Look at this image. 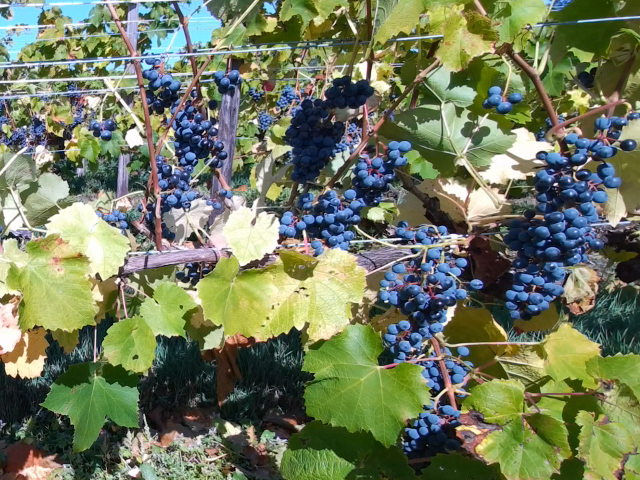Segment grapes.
<instances>
[{
  "label": "grapes",
  "mask_w": 640,
  "mask_h": 480,
  "mask_svg": "<svg viewBox=\"0 0 640 480\" xmlns=\"http://www.w3.org/2000/svg\"><path fill=\"white\" fill-rule=\"evenodd\" d=\"M443 249L441 247L430 248L426 256V261L420 262L418 258L411 259L409 265L419 268L428 274L422 285H410L419 283L421 278L414 274H406L403 280L397 274L407 271L404 262L395 263L391 270L385 273V279L380 281V286L387 290L379 292V298L383 302H388L390 306L399 307V312L404 316L409 315V321H397L396 324H388L384 334V339L391 343L389 352L397 355L392 359L393 364L405 362L411 348L416 355H423L430 350L429 346L423 348L422 343L430 340L433 334H442L445 331L448 307L456 304V300L465 299L468 292L465 289H458L457 280L448 276L453 274L461 277L464 268L469 266V261L462 257H452L445 254L443 263H438L442 259Z\"/></svg>",
  "instance_id": "grapes-2"
},
{
  "label": "grapes",
  "mask_w": 640,
  "mask_h": 480,
  "mask_svg": "<svg viewBox=\"0 0 640 480\" xmlns=\"http://www.w3.org/2000/svg\"><path fill=\"white\" fill-rule=\"evenodd\" d=\"M116 128L117 123L113 119H107L105 122H98L96 119H93L89 123V129L93 131V135L96 138H102L105 142L112 140V131Z\"/></svg>",
  "instance_id": "grapes-13"
},
{
  "label": "grapes",
  "mask_w": 640,
  "mask_h": 480,
  "mask_svg": "<svg viewBox=\"0 0 640 480\" xmlns=\"http://www.w3.org/2000/svg\"><path fill=\"white\" fill-rule=\"evenodd\" d=\"M446 367L451 371L449 378L452 384H461L464 378L467 376V372H470V368H474L475 364L472 361H464L469 367L464 366L463 363H457L452 359H446Z\"/></svg>",
  "instance_id": "grapes-14"
},
{
  "label": "grapes",
  "mask_w": 640,
  "mask_h": 480,
  "mask_svg": "<svg viewBox=\"0 0 640 480\" xmlns=\"http://www.w3.org/2000/svg\"><path fill=\"white\" fill-rule=\"evenodd\" d=\"M95 214L98 217L102 218L103 221L120 223L118 225V228L120 229V232L122 234L126 233L125 229L128 228V221L126 220L128 218V214L126 212L113 210L112 214H104L100 210H96Z\"/></svg>",
  "instance_id": "grapes-15"
},
{
  "label": "grapes",
  "mask_w": 640,
  "mask_h": 480,
  "mask_svg": "<svg viewBox=\"0 0 640 480\" xmlns=\"http://www.w3.org/2000/svg\"><path fill=\"white\" fill-rule=\"evenodd\" d=\"M217 123L215 117H211L208 121L204 118V114L193 107L190 100L185 102L183 111H179L171 124L174 131L173 149L177 158V165L183 168H175L164 163V156L159 154L156 159L158 180L162 190H168L171 186H178L173 194H163L161 196L160 205L163 212L170 211L173 207L176 210L187 209L192 205V201L197 199L194 191H189L188 183L191 181L192 174L195 172V165L199 159H205L204 165L208 168L221 169L223 161L228 157V153L224 151L226 144L221 141H212L209 138H203L201 135L204 131L210 137L218 135V129L214 127Z\"/></svg>",
  "instance_id": "grapes-5"
},
{
  "label": "grapes",
  "mask_w": 640,
  "mask_h": 480,
  "mask_svg": "<svg viewBox=\"0 0 640 480\" xmlns=\"http://www.w3.org/2000/svg\"><path fill=\"white\" fill-rule=\"evenodd\" d=\"M350 75L336 78L333 86L328 88L323 97L312 102L303 99L300 108L291 120V126L285 131L288 145L292 149V163L295 165L290 179L298 184H305L307 180H314L320 175V170L328 164V156L335 144L341 142L345 127L341 122L323 123L328 109L344 110L348 106L359 109L366 99L374 93V88L366 79L351 83Z\"/></svg>",
  "instance_id": "grapes-4"
},
{
  "label": "grapes",
  "mask_w": 640,
  "mask_h": 480,
  "mask_svg": "<svg viewBox=\"0 0 640 480\" xmlns=\"http://www.w3.org/2000/svg\"><path fill=\"white\" fill-rule=\"evenodd\" d=\"M523 100L520 92H514L507 96V100H503L502 89L498 86H490L486 90V99L482 102L484 109H492L496 106V112L499 115H507L513 110V104H519Z\"/></svg>",
  "instance_id": "grapes-9"
},
{
  "label": "grapes",
  "mask_w": 640,
  "mask_h": 480,
  "mask_svg": "<svg viewBox=\"0 0 640 480\" xmlns=\"http://www.w3.org/2000/svg\"><path fill=\"white\" fill-rule=\"evenodd\" d=\"M567 145H574L573 156L562 153L538 151L537 160H544L550 168L534 174L536 194L535 208L545 213L544 220L536 217L534 210H525L522 219L509 222L510 234L504 235L503 243L517 251L513 261L516 270L512 274L511 289L505 291V308L512 320L523 322L540 317L551 306L552 297H560L566 288L560 283L568 277L564 266L578 265L588 260L585 251L603 250L605 242L596 239L590 224L600 219L599 211L592 203L605 204L607 192L596 187L589 189V182L602 183L606 188L616 189L622 185L616 168L610 162L601 163L596 173L580 169L575 178L573 167L583 166L590 155L592 161L611 159L617 149L600 139L580 138L569 133L563 138ZM580 202L577 209L559 210L565 202Z\"/></svg>",
  "instance_id": "grapes-1"
},
{
  "label": "grapes",
  "mask_w": 640,
  "mask_h": 480,
  "mask_svg": "<svg viewBox=\"0 0 640 480\" xmlns=\"http://www.w3.org/2000/svg\"><path fill=\"white\" fill-rule=\"evenodd\" d=\"M185 268L190 270L188 275L184 271H178L176 278L181 281L182 284L189 283L191 278V284L196 285L200 280L199 265L197 263H186Z\"/></svg>",
  "instance_id": "grapes-16"
},
{
  "label": "grapes",
  "mask_w": 640,
  "mask_h": 480,
  "mask_svg": "<svg viewBox=\"0 0 640 480\" xmlns=\"http://www.w3.org/2000/svg\"><path fill=\"white\" fill-rule=\"evenodd\" d=\"M434 408L435 402L430 400L429 405H424L425 412H421L420 417H417L414 421V429H412L411 426H407L405 428V433L409 435L410 439L409 442H403L402 452L404 455H410L411 451H415L417 449L418 440H420L421 437H428L431 434V431L433 433H438L442 430L440 417L430 411Z\"/></svg>",
  "instance_id": "grapes-7"
},
{
  "label": "grapes",
  "mask_w": 640,
  "mask_h": 480,
  "mask_svg": "<svg viewBox=\"0 0 640 480\" xmlns=\"http://www.w3.org/2000/svg\"><path fill=\"white\" fill-rule=\"evenodd\" d=\"M412 149L409 140H391L388 143L387 159L381 156L372 160L367 154H361L357 160V167L353 170L355 175L352 184L356 189H347L343 197L351 201L343 210L339 207L341 200L337 198L334 190H328L324 195L317 197V209L325 211L322 215L302 214L301 220L295 223L294 213L284 211L280 217L282 225L279 233L286 238H295L300 231H306V235L312 241L311 247L314 254L320 256L324 253V246L316 237L327 240V246L331 249L348 251L351 239L355 238L354 232L348 227L351 223H359L362 220V207H378L383 200L381 191L388 189V184L395 181L396 170L394 167H405L408 159L402 153H408Z\"/></svg>",
  "instance_id": "grapes-3"
},
{
  "label": "grapes",
  "mask_w": 640,
  "mask_h": 480,
  "mask_svg": "<svg viewBox=\"0 0 640 480\" xmlns=\"http://www.w3.org/2000/svg\"><path fill=\"white\" fill-rule=\"evenodd\" d=\"M438 412L441 415H449L452 417V420L449 421L450 425H459L461 412L459 410H455L451 405H440L438 407Z\"/></svg>",
  "instance_id": "grapes-17"
},
{
  "label": "grapes",
  "mask_w": 640,
  "mask_h": 480,
  "mask_svg": "<svg viewBox=\"0 0 640 480\" xmlns=\"http://www.w3.org/2000/svg\"><path fill=\"white\" fill-rule=\"evenodd\" d=\"M161 226H163L162 238H165L166 240H171L176 238V233H174V231H170L169 227H167V224L165 222H162Z\"/></svg>",
  "instance_id": "grapes-18"
},
{
  "label": "grapes",
  "mask_w": 640,
  "mask_h": 480,
  "mask_svg": "<svg viewBox=\"0 0 640 480\" xmlns=\"http://www.w3.org/2000/svg\"><path fill=\"white\" fill-rule=\"evenodd\" d=\"M213 79L220 94L226 93L228 89L233 90L243 82V77L238 69L231 70L228 76L222 70L216 71Z\"/></svg>",
  "instance_id": "grapes-11"
},
{
  "label": "grapes",
  "mask_w": 640,
  "mask_h": 480,
  "mask_svg": "<svg viewBox=\"0 0 640 480\" xmlns=\"http://www.w3.org/2000/svg\"><path fill=\"white\" fill-rule=\"evenodd\" d=\"M414 365L426 367V369L422 371V377L427 380V385L432 387L434 391H439L441 389V375L438 361H418L414 362Z\"/></svg>",
  "instance_id": "grapes-12"
},
{
  "label": "grapes",
  "mask_w": 640,
  "mask_h": 480,
  "mask_svg": "<svg viewBox=\"0 0 640 480\" xmlns=\"http://www.w3.org/2000/svg\"><path fill=\"white\" fill-rule=\"evenodd\" d=\"M640 113H630L626 118L618 116L610 117H598L594 121V128L598 131H605L608 135L606 140L614 145L619 141V137L622 135V129L626 128L631 121L639 120Z\"/></svg>",
  "instance_id": "grapes-8"
},
{
  "label": "grapes",
  "mask_w": 640,
  "mask_h": 480,
  "mask_svg": "<svg viewBox=\"0 0 640 480\" xmlns=\"http://www.w3.org/2000/svg\"><path fill=\"white\" fill-rule=\"evenodd\" d=\"M409 227V222L407 220H400L396 224L395 233L398 237H405L406 239H414L416 244L422 243H433V235L436 232L434 227L424 226L419 228L417 231L407 230Z\"/></svg>",
  "instance_id": "grapes-10"
},
{
  "label": "grapes",
  "mask_w": 640,
  "mask_h": 480,
  "mask_svg": "<svg viewBox=\"0 0 640 480\" xmlns=\"http://www.w3.org/2000/svg\"><path fill=\"white\" fill-rule=\"evenodd\" d=\"M144 63L152 65L142 72V78L148 80L147 104L152 106L153 111L158 115H161L164 109H169V113L174 114L182 101L177 92L182 88V83L174 80L170 75L158 74L159 60H147Z\"/></svg>",
  "instance_id": "grapes-6"
}]
</instances>
